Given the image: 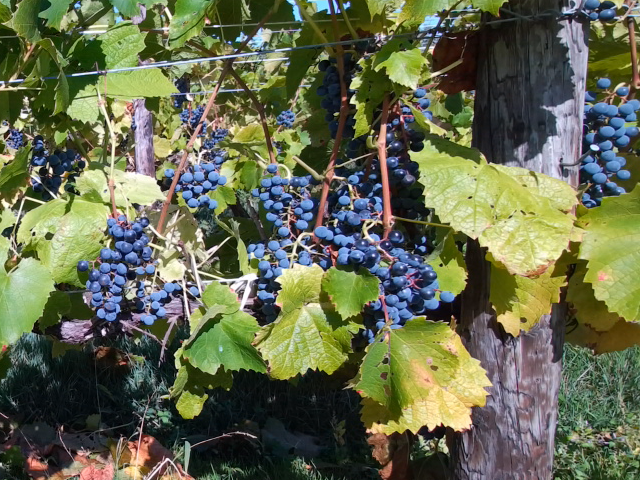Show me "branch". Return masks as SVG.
<instances>
[{
  "instance_id": "branch-6",
  "label": "branch",
  "mask_w": 640,
  "mask_h": 480,
  "mask_svg": "<svg viewBox=\"0 0 640 480\" xmlns=\"http://www.w3.org/2000/svg\"><path fill=\"white\" fill-rule=\"evenodd\" d=\"M283 0H277V2L270 9V12L259 22V24L246 36L243 42L235 49V53L239 54L243 48L251 41V39L263 28L267 21L275 14L276 10L281 6Z\"/></svg>"
},
{
  "instance_id": "branch-2",
  "label": "branch",
  "mask_w": 640,
  "mask_h": 480,
  "mask_svg": "<svg viewBox=\"0 0 640 480\" xmlns=\"http://www.w3.org/2000/svg\"><path fill=\"white\" fill-rule=\"evenodd\" d=\"M221 64L224 66L223 70L221 71V74L218 78V81L214 87L213 93L211 98L208 100L207 104H206V109L203 112V115L201 117V119L197 122V124L195 125V128L193 129L189 140H188V145L192 146L193 142L195 140V137L197 136L201 126L205 123V121L207 120L208 114L211 111V106L212 104L215 102L217 96H218V92L223 84L224 78L227 74V72L229 71L231 73L232 76H234L236 78V80L238 81V85L240 86V88L243 90V92L249 96V98L252 100L255 108L257 109V111L260 114L259 120L261 122V127H262V131L264 133V143L266 145V148L268 150L269 153V159L272 163L276 162V158L274 156V151H273V147L270 143L271 140V135H270V126H269V122L267 120L266 114L264 112V109L262 108V106L260 105L258 99L256 98V96L247 88V86L244 84L243 82V78L241 77L240 74H238L232 67L231 65L233 64V60H229V61H221Z\"/></svg>"
},
{
  "instance_id": "branch-3",
  "label": "branch",
  "mask_w": 640,
  "mask_h": 480,
  "mask_svg": "<svg viewBox=\"0 0 640 480\" xmlns=\"http://www.w3.org/2000/svg\"><path fill=\"white\" fill-rule=\"evenodd\" d=\"M389 118V98L384 96L382 98V116L380 121V131L377 141V150L380 152V184L384 198V217H383V229L382 238L387 240L389 238V232L391 231V196L387 182V145L385 144V138L387 133V123Z\"/></svg>"
},
{
  "instance_id": "branch-1",
  "label": "branch",
  "mask_w": 640,
  "mask_h": 480,
  "mask_svg": "<svg viewBox=\"0 0 640 480\" xmlns=\"http://www.w3.org/2000/svg\"><path fill=\"white\" fill-rule=\"evenodd\" d=\"M336 59H337V62H336L337 69L339 73L338 83L340 86V93H341V110L338 118L339 125L336 127V130H335L333 142L331 144V150L328 156L327 168L324 173L325 182L323 184V188L321 191L322 195L320 196V199H319L318 211L315 218V224L317 226H320L323 221L326 202H327V195L329 194L330 186L334 180L333 170H334L335 158L337 156L338 147H339L342 132H343V126L345 124V120L348 113V98H347L348 91H347V87L345 86L346 81H345V71H344V61H343V49L341 47L336 48Z\"/></svg>"
},
{
  "instance_id": "branch-5",
  "label": "branch",
  "mask_w": 640,
  "mask_h": 480,
  "mask_svg": "<svg viewBox=\"0 0 640 480\" xmlns=\"http://www.w3.org/2000/svg\"><path fill=\"white\" fill-rule=\"evenodd\" d=\"M187 155H188V151L184 150L183 153H182V156L180 158L179 164H178V169H177V171H176V173H175V175H174V177H173V179L171 181V184H170L168 192H167V196H166V198H165V200L163 202L162 210H161V214H160V219H159V222L157 224V232L158 233L162 232V227H163V224L165 222V216H166L167 208H168V205L170 203V200L172 199L173 191H174V189L176 187V184H177V182L179 180V177L181 176V173L183 171V167H184Z\"/></svg>"
},
{
  "instance_id": "branch-7",
  "label": "branch",
  "mask_w": 640,
  "mask_h": 480,
  "mask_svg": "<svg viewBox=\"0 0 640 480\" xmlns=\"http://www.w3.org/2000/svg\"><path fill=\"white\" fill-rule=\"evenodd\" d=\"M327 8H328V13H329L331 24H332V31H333L334 40L336 42H339L341 40V33H340V29H339L338 17H337L336 11H335V6H334V1L333 0H328L327 1Z\"/></svg>"
},
{
  "instance_id": "branch-8",
  "label": "branch",
  "mask_w": 640,
  "mask_h": 480,
  "mask_svg": "<svg viewBox=\"0 0 640 480\" xmlns=\"http://www.w3.org/2000/svg\"><path fill=\"white\" fill-rule=\"evenodd\" d=\"M188 45L191 46V47H195V48H198L200 50H203L205 53H207V54H209V55H211L213 57L218 56V53L216 51H213L212 49H209L207 46L202 45L200 43L189 41Z\"/></svg>"
},
{
  "instance_id": "branch-4",
  "label": "branch",
  "mask_w": 640,
  "mask_h": 480,
  "mask_svg": "<svg viewBox=\"0 0 640 480\" xmlns=\"http://www.w3.org/2000/svg\"><path fill=\"white\" fill-rule=\"evenodd\" d=\"M97 97H98V101L100 104V108L102 110V116H103V120L106 124L109 136L111 138V145H110V156H109V199H110V203H111V208H112V217L114 219L118 218L117 215V205H116V200H115V193H114V159H115V148H116V136L115 133L113 131L112 128V124L111 121L108 117V113H107V107L105 105L104 99H103V94L101 91L97 92Z\"/></svg>"
}]
</instances>
